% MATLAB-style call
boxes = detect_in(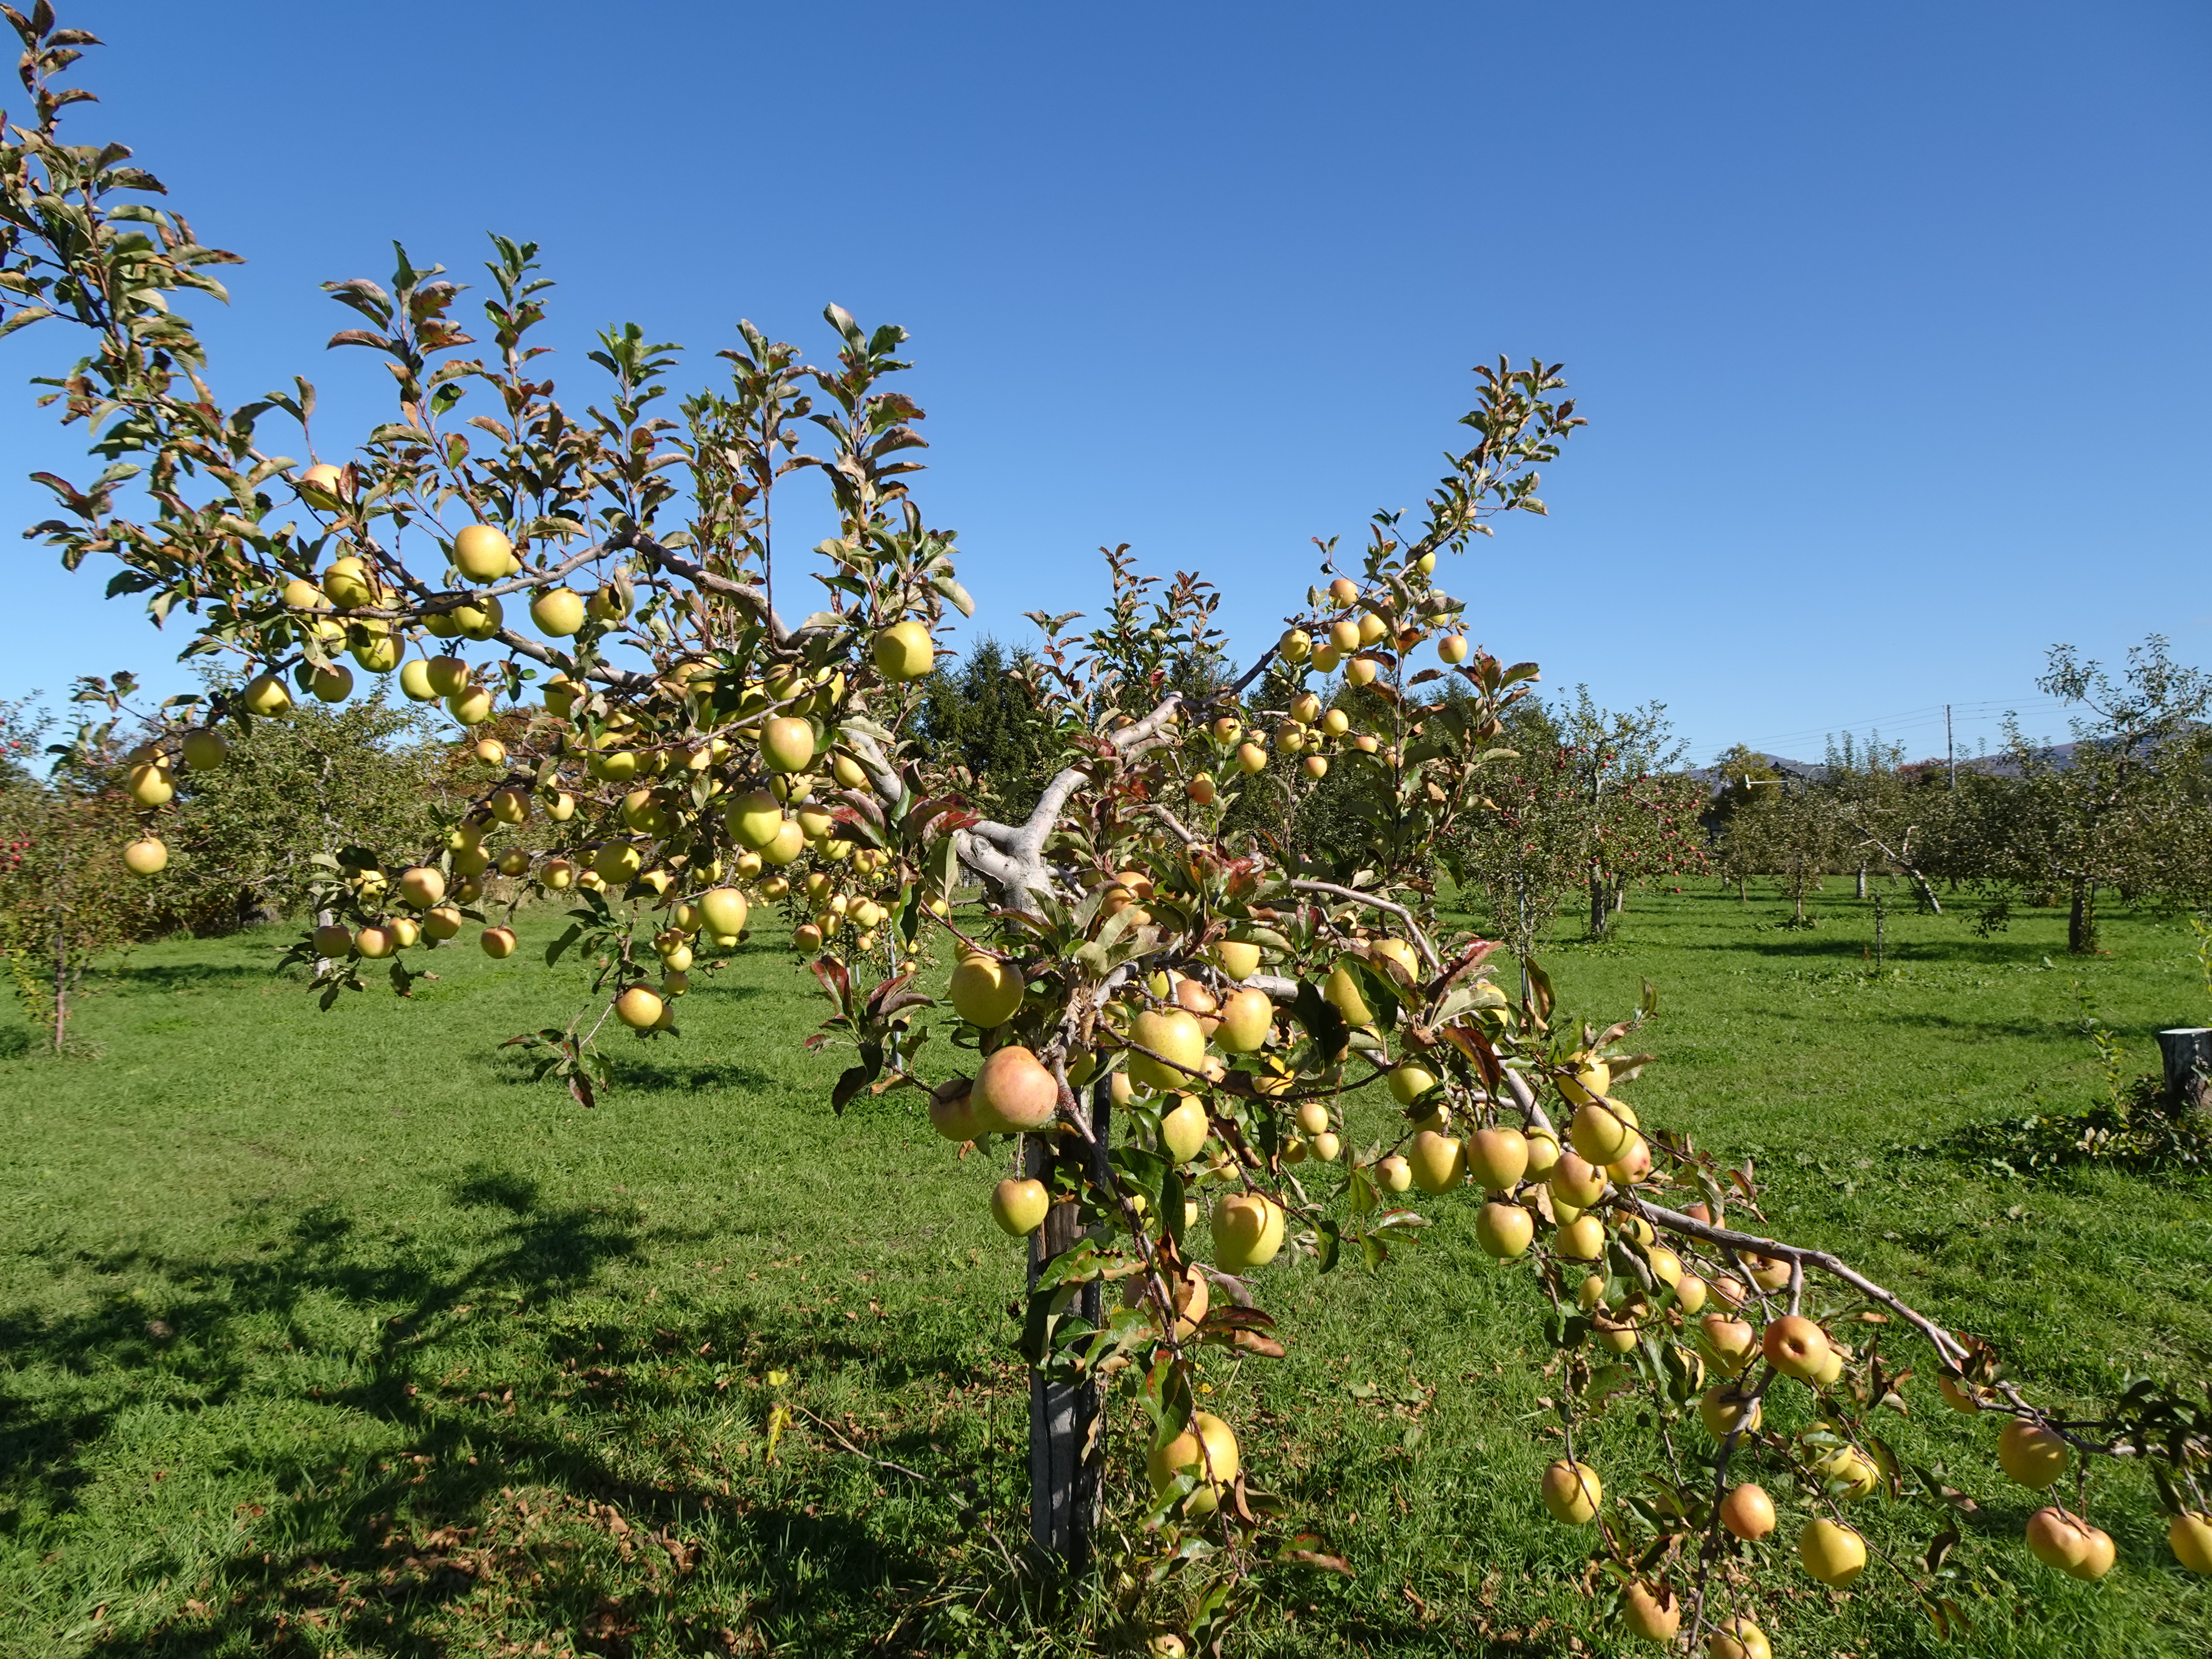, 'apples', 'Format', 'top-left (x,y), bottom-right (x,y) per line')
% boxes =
(1123, 1266), (1208, 1344)
(1164, 979), (1222, 1038)
(454, 846), (489, 877)
(1622, 1579), (1680, 1642)
(1253, 1077), (1284, 1095)
(858, 777), (873, 793)
(1381, 746), (1404, 769)
(2170, 1511), (2212, 1575)
(544, 673), (590, 719)
(1604, 1135), (1650, 1185)
(803, 660), (844, 708)
(1280, 629), (1311, 661)
(1270, 1025), (1294, 1047)
(585, 595), (600, 616)
(1613, 1208), (1658, 1245)
(1064, 1045), (1097, 1087)
(674, 905), (703, 933)
(1709, 1272), (1746, 1311)
(1209, 1148), (1243, 1182)
(1541, 1460), (1602, 1525)
(129, 765), (175, 807)
(1147, 967), (1189, 1003)
(1438, 635), (1467, 664)
(735, 853), (762, 878)
(873, 621), (933, 682)
(2066, 1525), (2115, 1581)
(1237, 743), (1267, 774)
(682, 931), (695, 943)
(400, 868), (445, 909)
(637, 745), (669, 773)
(856, 902), (880, 928)
(351, 862), (389, 900)
(336, 617), (362, 651)
(833, 749), (867, 788)
(604, 706), (642, 735)
(481, 925), (516, 959)
(1214, 718), (1242, 745)
(1835, 1449), (1880, 1500)
(301, 464), (342, 511)
(815, 829), (851, 861)
(1211, 1191), (1284, 1266)
(1674, 1346), (1705, 1392)
(467, 801), (499, 834)
(1800, 1335), (1842, 1385)
(182, 730), (226, 770)
(530, 771), (557, 793)
(1701, 1385), (1762, 1447)
(1388, 1061), (1438, 1105)
(794, 924), (823, 952)
(803, 835), (815, 847)
(1762, 1315), (1829, 1378)
(1214, 1247), (1245, 1276)
(1738, 1238), (1791, 1289)
(734, 679), (773, 727)
(763, 664), (816, 718)
(400, 660), (436, 702)
(1329, 621), (1360, 652)
(1467, 1127), (1529, 1190)
(1710, 1617), (1772, 1659)
(919, 888), (947, 919)
(1280, 1136), (1308, 1164)
(1146, 1411), (1239, 1514)
(1127, 1193), (1155, 1231)
(769, 769), (814, 804)
(593, 839), (640, 885)
(1546, 1181), (1584, 1227)
(1332, 910), (1357, 929)
(454, 525), (511, 584)
(1127, 1007), (1205, 1090)
(312, 665), (353, 703)
(1408, 1131), (1467, 1195)
(884, 902), (900, 918)
(725, 790), (782, 850)
(1554, 1230), (1584, 1265)
(1280, 719), (1307, 734)
(991, 1177), (1049, 1237)
(674, 663), (707, 688)
(1475, 984), (1507, 1027)
(387, 917), (419, 949)
(852, 848), (877, 875)
(452, 874), (482, 903)
(543, 792), (574, 822)
(1216, 686), (1239, 714)
(654, 927), (684, 956)
(650, 1003), (673, 1030)
(662, 946), (693, 972)
(1375, 1155), (1412, 1193)
(1354, 736), (1377, 753)
(693, 649), (719, 669)
(1186, 772), (1216, 804)
(1684, 1203), (1725, 1245)
(1698, 1313), (1758, 1374)
(758, 820), (803, 865)
(805, 873), (833, 899)
(1349, 937), (1371, 947)
(313, 925), (352, 958)
(1998, 1418), (2067, 1490)
(1939, 1359), (1996, 1414)
(349, 620), (405, 673)
(1800, 1518), (1866, 1587)
(530, 586), (584, 637)
(761, 876), (789, 901)
(1303, 756), (1327, 778)
(638, 869), (666, 898)
(1560, 1215), (1606, 1260)
(663, 972), (689, 997)
(281, 580), (331, 624)
(970, 1046), (1058, 1133)
(1676, 1272), (1707, 1315)
(1571, 1097), (1639, 1165)
(421, 595), (462, 638)
(1209, 941), (1260, 981)
(1199, 1056), (1227, 1083)
(501, 543), (521, 577)
(669, 746), (711, 770)
(1321, 709), (1348, 737)
(823, 893), (847, 917)
(587, 732), (641, 782)
(1580, 1276), (1605, 1309)
(954, 938), (981, 962)
(1160, 1089), (1209, 1165)
(1184, 1197), (1198, 1230)
(697, 888), (747, 936)
(706, 734), (732, 765)
(622, 789), (666, 832)
(1521, 1126), (1560, 1183)
(1290, 694), (1320, 723)
(871, 841), (892, 866)
(1300, 729), (1323, 754)
(1558, 1050), (1610, 1103)
(491, 786), (531, 824)
(711, 932), (739, 948)
(324, 556), (372, 609)
(562, 726), (589, 759)
(1276, 725), (1305, 754)
(596, 584), (632, 621)
(1551, 1151), (1607, 1208)
(692, 857), (721, 884)
(1410, 1103), (1452, 1135)
(1405, 544), (1435, 577)
(1311, 644), (1340, 673)
(929, 1080), (983, 1141)
(1719, 1483), (1775, 1541)
(1380, 596), (1397, 609)
(1476, 1202), (1533, 1258)
(615, 984), (662, 1029)
(759, 717), (814, 773)
(816, 910), (842, 937)
(1250, 730), (1267, 746)
(1641, 1245), (1681, 1290)
(423, 907), (461, 939)
(361, 587), (405, 627)
(453, 590), (503, 641)
(446, 819), (481, 857)
(1802, 1422), (1853, 1475)
(1346, 657), (1376, 686)
(1114, 716), (1136, 731)
(576, 870), (606, 894)
(1310, 1131), (1339, 1162)
(1324, 968), (1373, 1026)
(245, 674), (291, 717)
(1368, 938), (1419, 984)
(123, 837), (167, 878)
(845, 896), (871, 921)
(1296, 1104), (1328, 1136)
(1598, 1321), (1637, 1354)
(1211, 987), (1272, 1053)
(708, 778), (734, 806)
(300, 619), (346, 655)
(540, 859), (573, 890)
(475, 739), (506, 767)
(126, 746), (171, 771)
(2026, 1507), (2090, 1569)
(1386, 622), (1414, 649)
(1357, 613), (1387, 645)
(1328, 578), (1358, 609)
(355, 926), (393, 959)
(1422, 613), (1448, 629)
(450, 684), (493, 725)
(688, 681), (739, 726)
(950, 951), (1024, 1028)
(1111, 1072), (1136, 1109)
(576, 850), (598, 868)
(1270, 1190), (1288, 1214)
(426, 655), (470, 696)
(1167, 712), (1179, 724)
(386, 947), (399, 958)
(497, 846), (529, 877)
(796, 803), (833, 837)
(1100, 872), (1157, 927)
(737, 727), (761, 742)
